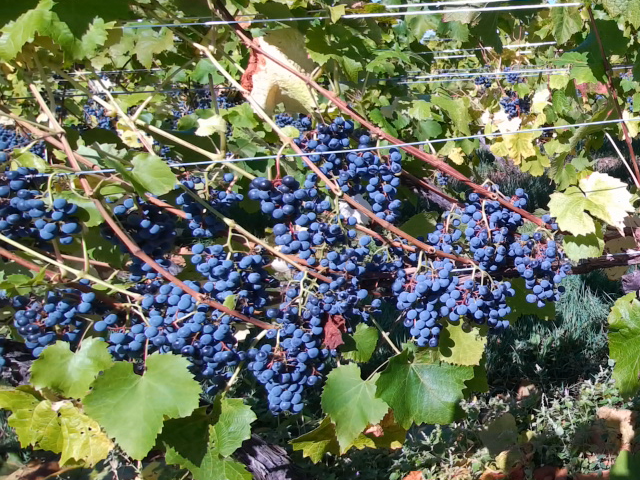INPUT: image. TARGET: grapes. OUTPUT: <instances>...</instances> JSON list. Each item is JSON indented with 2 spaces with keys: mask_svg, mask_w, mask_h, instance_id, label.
<instances>
[{
  "mask_svg": "<svg viewBox=\"0 0 640 480\" xmlns=\"http://www.w3.org/2000/svg\"><path fill=\"white\" fill-rule=\"evenodd\" d=\"M205 250L203 243H196L190 247L191 263L195 265V271L208 281L202 286L197 280L185 279L184 284L194 292L211 293L213 298L224 302L227 296L235 295L239 299H247L248 304L241 310L253 315L256 309H261L266 304L265 285H272L274 277L262 265H268L270 258L264 255H249L234 252L232 261H225L226 253L222 245H211L206 248V253L212 255L207 261L201 253Z\"/></svg>",
  "mask_w": 640,
  "mask_h": 480,
  "instance_id": "84f90ec7",
  "label": "grapes"
},
{
  "mask_svg": "<svg viewBox=\"0 0 640 480\" xmlns=\"http://www.w3.org/2000/svg\"><path fill=\"white\" fill-rule=\"evenodd\" d=\"M79 223L76 220L67 221L61 225L63 235L59 238V243L68 246L75 241L74 233L78 230Z\"/></svg>",
  "mask_w": 640,
  "mask_h": 480,
  "instance_id": "91a60905",
  "label": "grapes"
},
{
  "mask_svg": "<svg viewBox=\"0 0 640 480\" xmlns=\"http://www.w3.org/2000/svg\"><path fill=\"white\" fill-rule=\"evenodd\" d=\"M444 229V223H435V230L433 233H427V240L431 247L455 254H461L463 252L462 245L452 247V241H458L462 237V231L460 229H453L452 233H442Z\"/></svg>",
  "mask_w": 640,
  "mask_h": 480,
  "instance_id": "1ff8f66d",
  "label": "grapes"
},
{
  "mask_svg": "<svg viewBox=\"0 0 640 480\" xmlns=\"http://www.w3.org/2000/svg\"><path fill=\"white\" fill-rule=\"evenodd\" d=\"M180 182H183L189 189H193L194 184H201L204 182V179L202 177H190L187 180L181 178Z\"/></svg>",
  "mask_w": 640,
  "mask_h": 480,
  "instance_id": "34c12dc5",
  "label": "grapes"
},
{
  "mask_svg": "<svg viewBox=\"0 0 640 480\" xmlns=\"http://www.w3.org/2000/svg\"><path fill=\"white\" fill-rule=\"evenodd\" d=\"M27 174L39 173L38 169L19 167L17 171L7 170L4 178L9 181L8 185H0V198H4L11 191H16L18 196L11 197L8 203L0 205V230L3 234L12 236L14 239L18 235L22 238L34 237L36 240L48 241L57 237L58 225L54 222L48 223L45 219H35L33 226L28 230L23 228L32 218H49L59 221L63 217L73 215L78 209V203H69L64 198H56L52 203V211L48 213L41 210L44 202L35 199L34 195H40V190L22 189L25 186V176Z\"/></svg>",
  "mask_w": 640,
  "mask_h": 480,
  "instance_id": "5460f4e3",
  "label": "grapes"
},
{
  "mask_svg": "<svg viewBox=\"0 0 640 480\" xmlns=\"http://www.w3.org/2000/svg\"><path fill=\"white\" fill-rule=\"evenodd\" d=\"M105 221L100 224V235L110 240L112 246H118L120 250L127 254L134 264L129 266L131 272L130 279L138 282L143 279V275L150 281L148 284H130L129 291L140 293L145 298L140 302V307L148 311L149 326L140 319L137 314L130 317L129 332L116 331L108 336V352L119 359L126 357H137L143 352V345L147 339L149 344L146 352L152 355L159 349L161 354H166L173 350L175 354H181L188 362L196 363L188 366V371L194 375L196 382L203 379H211L215 384L206 389L208 395L216 396L228 381L233 378L232 372L222 373L223 367H235L240 365V361L247 359V370L254 373V379L264 385L266 390L269 413L273 417H279L282 411H288L292 415H298L304 408L302 393L305 387H312L321 382L319 375L301 374L306 370L305 362L308 359L317 358L315 364L317 371L325 368V362L329 357L335 358L338 355L336 348L321 349L319 347L324 342V328L322 316H334L337 313L343 314L345 318L353 316L362 317L365 321L370 319V313L358 309L359 300L367 297L368 291L365 288L358 289L364 275L369 272L389 271L396 272V279L389 287L392 295L389 303L395 306L397 311H405L406 317L403 319V327L410 329V335L417 338V345L420 348H435L439 345V334L441 326L436 323L438 312L434 310V305L439 301L444 305L439 308V316L457 321L459 315L473 314V321L477 325H482L487 316L488 324L495 329H506L509 326L507 319H499L511 313V308L507 306L506 297H513L515 289L511 287L509 281L501 282L493 279L491 286L495 288L492 292L490 287L481 284L479 281L467 280L464 285L459 286V278L452 276L451 272L454 263L449 259L432 260L433 268L438 272L427 270L424 274L415 276L414 292L404 290L406 281V269L404 268V249L399 246L389 247L391 253L399 256L393 262H386L387 251L383 255L375 254L373 262H367L365 267H357L358 261L364 259V255L369 253L367 247L372 242L370 235H363L359 240L361 248L345 249L340 255L336 251H330L326 257L320 259V265L331 270L344 273H353L349 278V288L345 291L342 288L346 284V279L340 274L332 275V284L320 283L317 292L321 295V300L313 294H309L306 299L305 309L301 311V318L308 322L310 332L298 329V322H291L289 319L298 314L296 307H290L299 296V288L290 285L286 289L284 301L278 309L267 308L265 317L275 320L280 326V335L291 338L280 342V348L286 350V357L293 366L291 371L284 372V363L274 361L272 366L271 353L272 345L264 343L259 348H248L246 351L234 347L237 344L235 324H244L245 320L237 316L222 315V311L214 309L211 312V321L206 319L209 311L207 303H201L196 307V313L185 319L194 309L196 298L185 293L174 283L161 284L159 280L164 275L155 271L150 265L134 255L125 246V241L121 240L115 231L108 227Z\"/></svg>",
  "mask_w": 640,
  "mask_h": 480,
  "instance_id": "01657485",
  "label": "grapes"
},
{
  "mask_svg": "<svg viewBox=\"0 0 640 480\" xmlns=\"http://www.w3.org/2000/svg\"><path fill=\"white\" fill-rule=\"evenodd\" d=\"M353 127L354 123L352 121H344L342 117H336L328 127L323 123H318L314 126L316 139L314 137L306 139L304 134H300L293 139V142L297 146L305 144L308 149H315V151L347 148L350 145L347 132H350Z\"/></svg>",
  "mask_w": 640,
  "mask_h": 480,
  "instance_id": "ef6de9ee",
  "label": "grapes"
},
{
  "mask_svg": "<svg viewBox=\"0 0 640 480\" xmlns=\"http://www.w3.org/2000/svg\"><path fill=\"white\" fill-rule=\"evenodd\" d=\"M118 322V316L116 314H108L102 317V320H95L93 322V329L96 333L105 332L110 326L115 325Z\"/></svg>",
  "mask_w": 640,
  "mask_h": 480,
  "instance_id": "dcf779d0",
  "label": "grapes"
},
{
  "mask_svg": "<svg viewBox=\"0 0 640 480\" xmlns=\"http://www.w3.org/2000/svg\"><path fill=\"white\" fill-rule=\"evenodd\" d=\"M176 206H183L187 214L188 229L192 237L212 238L225 232V225L212 212H206L204 206L195 202L186 193H179L175 198Z\"/></svg>",
  "mask_w": 640,
  "mask_h": 480,
  "instance_id": "2adb6a1f",
  "label": "grapes"
},
{
  "mask_svg": "<svg viewBox=\"0 0 640 480\" xmlns=\"http://www.w3.org/2000/svg\"><path fill=\"white\" fill-rule=\"evenodd\" d=\"M316 172H308L304 180L305 189H301V183L293 176H284L280 180L278 187H273V182L264 176H257L248 184L247 198L249 200H260L259 207L264 214H270L274 220L285 219L287 215L292 216V221L298 226H306L309 222L308 230H297L293 235L290 228L285 223H277L272 227L274 242L281 246L283 253H298L300 259H306L309 264L314 265L317 259L313 245H320L324 242L332 245L337 239L342 237V228L338 224L328 225L326 222H314L316 214L322 213L330 208L327 200L317 199L315 203L308 200L303 207L308 211L301 214L298 206L306 196L315 198L317 196Z\"/></svg>",
  "mask_w": 640,
  "mask_h": 480,
  "instance_id": "0513c4c2",
  "label": "grapes"
},
{
  "mask_svg": "<svg viewBox=\"0 0 640 480\" xmlns=\"http://www.w3.org/2000/svg\"><path fill=\"white\" fill-rule=\"evenodd\" d=\"M135 205V200L133 198L125 199L122 204H118L114 207L113 213L116 216L123 215L128 210L132 209Z\"/></svg>",
  "mask_w": 640,
  "mask_h": 480,
  "instance_id": "802abce8",
  "label": "grapes"
},
{
  "mask_svg": "<svg viewBox=\"0 0 640 480\" xmlns=\"http://www.w3.org/2000/svg\"><path fill=\"white\" fill-rule=\"evenodd\" d=\"M388 163H380V158L372 154V151L345 154L344 161L348 168H336L342 163L340 154H326L325 162L319 167L324 175L332 174L337 177L338 186L348 196L357 193L363 195L368 192V197L373 199L372 211L376 216L388 223H394L401 215L398 210L402 207V201L394 198L398 193L400 178L394 174L403 172V153L398 149L389 150Z\"/></svg>",
  "mask_w": 640,
  "mask_h": 480,
  "instance_id": "f8a65327",
  "label": "grapes"
},
{
  "mask_svg": "<svg viewBox=\"0 0 640 480\" xmlns=\"http://www.w3.org/2000/svg\"><path fill=\"white\" fill-rule=\"evenodd\" d=\"M514 195L516 197H519L518 201H514L513 204L516 205L517 207L521 208L526 207L527 206V202L529 200V194L526 193L525 189L523 187H517L514 190Z\"/></svg>",
  "mask_w": 640,
  "mask_h": 480,
  "instance_id": "012428b0",
  "label": "grapes"
},
{
  "mask_svg": "<svg viewBox=\"0 0 640 480\" xmlns=\"http://www.w3.org/2000/svg\"><path fill=\"white\" fill-rule=\"evenodd\" d=\"M480 200L481 195L478 192H472L469 195V201L464 203L465 211L455 209L460 218L454 217L452 219L454 227L467 224V229H464L465 237L470 244L473 259L479 261V268L495 272L497 265L504 263L507 254L509 257L515 256L514 267L517 268V273L521 274V277L525 280L526 289L532 292L524 296L525 302L536 303L538 308L546 306V299L548 302H558L561 298L559 293H564L565 287L558 285L557 291L559 293H553L555 283L561 284L563 282L571 265H561L556 273L551 270L553 263L556 261V256L559 259L563 258L562 252L556 250L557 242L549 240L547 247L541 250L542 257L533 260L530 257H523V255L531 253L534 242H539L543 239V233L534 232L532 234L533 240L530 239L528 234H521L520 241L526 242L523 247H521L520 243L513 242L512 233L516 232L519 226L524 224L523 216L510 208L503 207L499 201H488L485 204V213L489 217L487 220L488 228H481L479 226V220L482 218ZM546 273L550 275L551 279L549 281L542 280L540 285H536L534 275L537 278H542Z\"/></svg>",
  "mask_w": 640,
  "mask_h": 480,
  "instance_id": "b958b902",
  "label": "grapes"
},
{
  "mask_svg": "<svg viewBox=\"0 0 640 480\" xmlns=\"http://www.w3.org/2000/svg\"><path fill=\"white\" fill-rule=\"evenodd\" d=\"M137 203L142 207L141 215L128 216V224L137 228L132 239L144 253L168 269L170 261L162 256L173 251V240L178 235L174 229L177 217L172 213H161V206L145 201L142 195L137 197Z\"/></svg>",
  "mask_w": 640,
  "mask_h": 480,
  "instance_id": "e5b3c951",
  "label": "grapes"
},
{
  "mask_svg": "<svg viewBox=\"0 0 640 480\" xmlns=\"http://www.w3.org/2000/svg\"><path fill=\"white\" fill-rule=\"evenodd\" d=\"M210 194L213 197L210 204L220 212H224L227 208L237 205L244 200V195L240 192L230 191L228 193L226 191H220L217 187H212Z\"/></svg>",
  "mask_w": 640,
  "mask_h": 480,
  "instance_id": "54f908b8",
  "label": "grapes"
},
{
  "mask_svg": "<svg viewBox=\"0 0 640 480\" xmlns=\"http://www.w3.org/2000/svg\"><path fill=\"white\" fill-rule=\"evenodd\" d=\"M66 293H74L81 298L77 305H71L68 299L56 298L52 290L47 291V303L33 301L29 309H24L30 304V299L23 295H15L12 298V307L17 311L13 314L14 326L18 328V334L22 339H26L25 347L32 350L34 357H39L46 345L57 343V333L55 331L42 332L36 321L42 318L40 312L48 313L43 318L44 327L56 325L68 326L70 323L75 327L73 331L65 332L63 340L66 342H77L83 333L87 321L83 318L74 317L75 313H89L92 310V302L96 298L94 292L85 293L74 288H66Z\"/></svg>",
  "mask_w": 640,
  "mask_h": 480,
  "instance_id": "83cd7487",
  "label": "grapes"
},
{
  "mask_svg": "<svg viewBox=\"0 0 640 480\" xmlns=\"http://www.w3.org/2000/svg\"><path fill=\"white\" fill-rule=\"evenodd\" d=\"M333 221L335 223H344L346 221V224L348 226L351 227H355L358 224V219L355 216H349L347 219L343 214H338L333 218Z\"/></svg>",
  "mask_w": 640,
  "mask_h": 480,
  "instance_id": "9fbda902",
  "label": "grapes"
}]
</instances>
